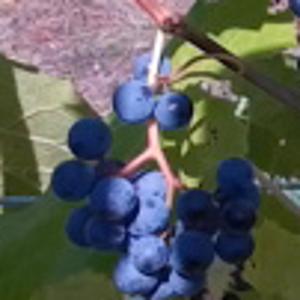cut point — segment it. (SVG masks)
Here are the masks:
<instances>
[{"instance_id":"obj_1","label":"cut point","mask_w":300,"mask_h":300,"mask_svg":"<svg viewBox=\"0 0 300 300\" xmlns=\"http://www.w3.org/2000/svg\"><path fill=\"white\" fill-rule=\"evenodd\" d=\"M155 42H154V49L152 55V62H151V75L149 80V89L154 91L156 89V83L158 78V65H159V57L161 52V45L162 40L164 38V31L157 29L155 31Z\"/></svg>"}]
</instances>
